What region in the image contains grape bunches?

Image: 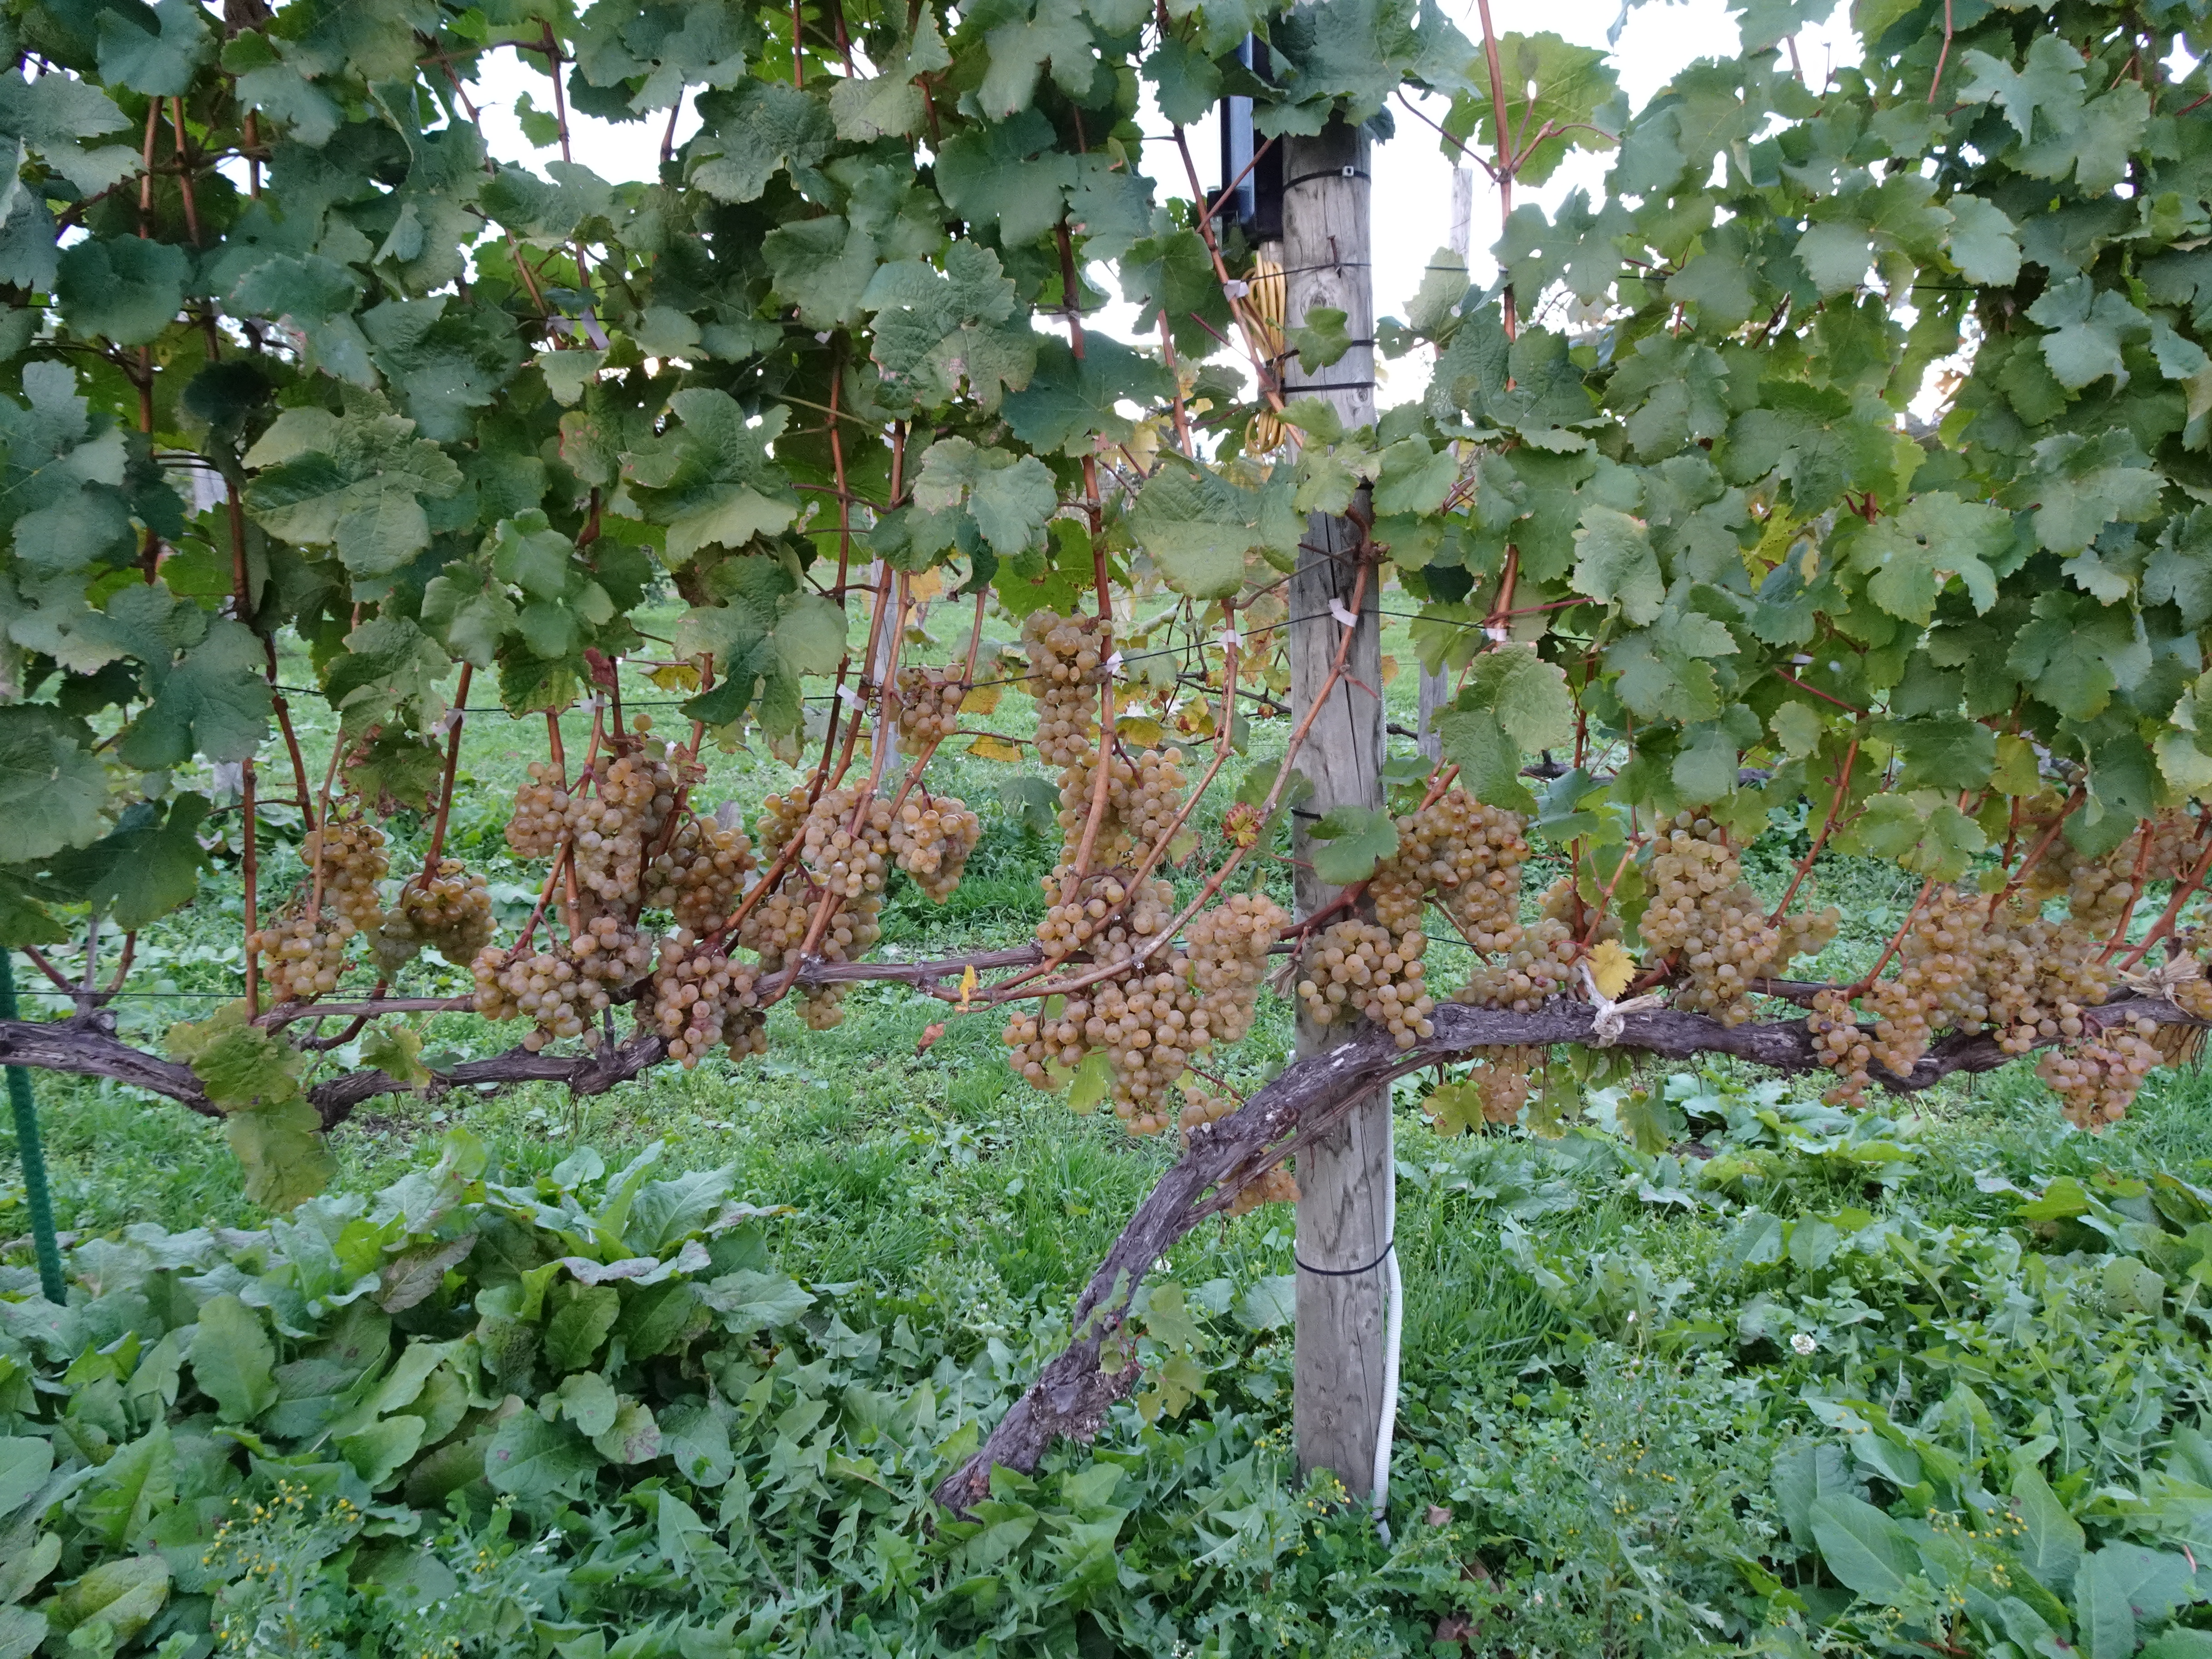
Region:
[1168,889,1292,1044]
[1086,978,1210,1137]
[739,880,804,978]
[720,1008,774,1062]
[1112,744,1192,871]
[1861,970,1936,1082]
[1172,1089,1248,1152]
[792,979,865,1035]
[1219,1145,1307,1219]
[2082,1010,2172,1123]
[884,787,984,906]
[2009,790,2081,919]
[1427,775,1534,953]
[806,896,887,969]
[299,810,387,933]
[641,817,758,931]
[1805,991,1873,1109]
[500,955,583,1052]
[1697,878,1771,922]
[1914,888,2001,951]
[1987,913,2059,984]
[649,931,761,1076]
[887,665,968,756]
[2143,811,2210,890]
[757,765,822,861]
[571,917,653,1010]
[1676,909,1784,1025]
[244,920,353,1005]
[1986,979,2042,1058]
[1463,1041,1556,1124]
[367,905,419,984]
[1448,917,1582,1015]
[2170,972,2212,1023]
[1018,608,1114,768]
[1778,900,1848,972]
[408,855,498,970]
[471,947,514,1026]
[2034,967,2111,1039]
[1901,953,1993,1033]
[502,760,572,859]
[1539,864,1628,948]
[1298,919,1436,1052]
[2054,864,2147,984]
[2031,1049,2107,1134]
[544,873,624,934]
[799,774,893,898]
[1639,807,1740,964]
[1002,993,1097,1093]
[1033,872,1178,960]
[1366,788,1439,936]
[569,798,637,901]
[1052,759,1136,881]
[597,713,675,835]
